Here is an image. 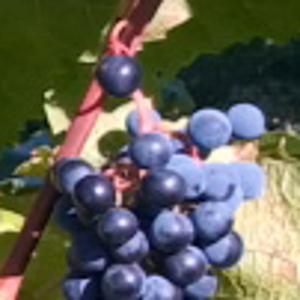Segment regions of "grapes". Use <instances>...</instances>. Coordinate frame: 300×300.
<instances>
[{
    "mask_svg": "<svg viewBox=\"0 0 300 300\" xmlns=\"http://www.w3.org/2000/svg\"><path fill=\"white\" fill-rule=\"evenodd\" d=\"M140 120L132 107L125 127L133 140L103 168L76 156L55 165L64 197L54 222L73 237L63 255L67 300L209 299L221 288L214 270L243 259L233 213L266 194V174L247 160L211 162L210 154L259 138L265 108L201 107L177 136L143 133Z\"/></svg>",
    "mask_w": 300,
    "mask_h": 300,
    "instance_id": "1",
    "label": "grapes"
},
{
    "mask_svg": "<svg viewBox=\"0 0 300 300\" xmlns=\"http://www.w3.org/2000/svg\"><path fill=\"white\" fill-rule=\"evenodd\" d=\"M96 81L114 97H128L141 87V65L137 58L105 55L95 67Z\"/></svg>",
    "mask_w": 300,
    "mask_h": 300,
    "instance_id": "2",
    "label": "grapes"
}]
</instances>
